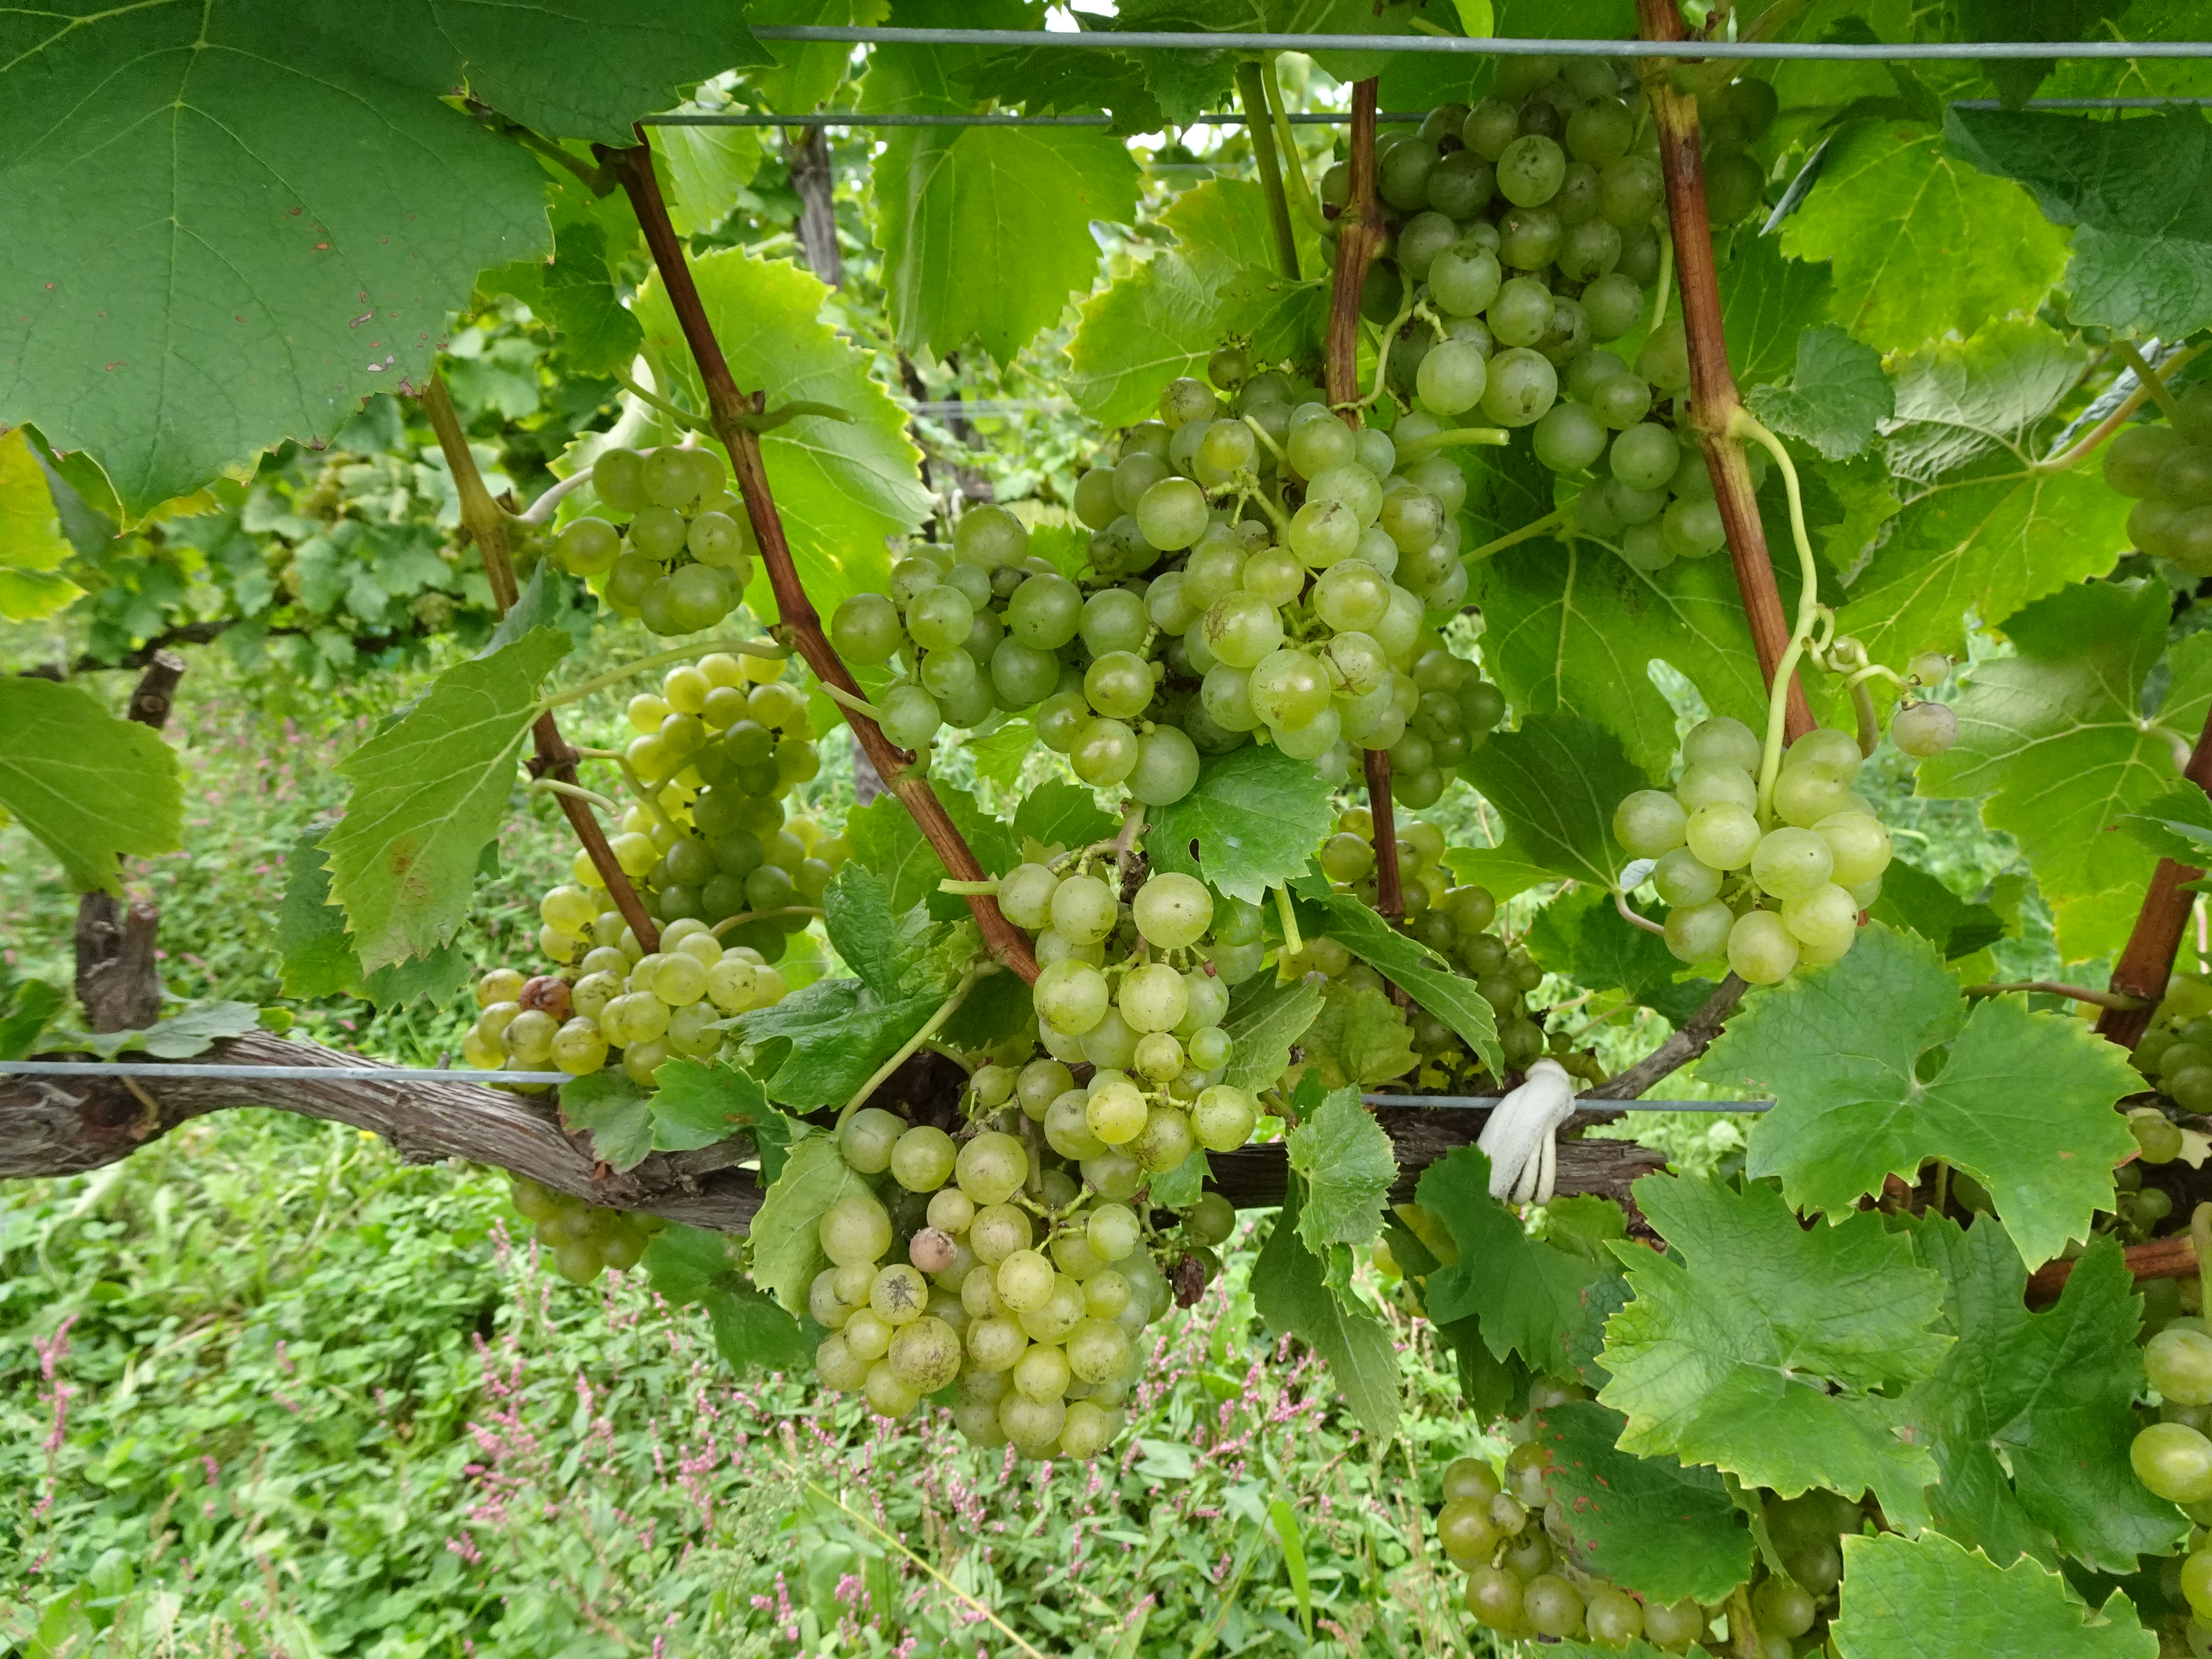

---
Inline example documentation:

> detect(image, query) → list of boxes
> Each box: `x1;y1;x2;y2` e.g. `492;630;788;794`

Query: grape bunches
1033;589;1198;805
1890;652;1959;758
998;863;1257;1204
1953;1170;1998;1219
1320;807;1543;1072
1752;1485;1882;1659
2076;973;2212;1115
1322;51;1777;427
1613;716;1893;985
614;637;822;874
1531;324;1728;571
460;912;786;1285
1437;1374;1727;1654
2093;1114;2184;1222
910;1066;1235;1461
2103;380;2212;579
2131;1316;2212;1659
832;503;1083;751
1347;631;1505;811
537;815;841;964
1075;350;1466;760
809;1106;961;1421
553;446;761;636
